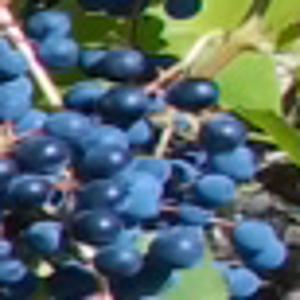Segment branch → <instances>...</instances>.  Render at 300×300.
I'll use <instances>...</instances> for the list:
<instances>
[{
  "mask_svg": "<svg viewBox=\"0 0 300 300\" xmlns=\"http://www.w3.org/2000/svg\"><path fill=\"white\" fill-rule=\"evenodd\" d=\"M270 8V0H253L239 23L227 29L225 37L197 64L195 74L215 79L228 61L236 59L241 53L253 52L260 40L257 22Z\"/></svg>",
  "mask_w": 300,
  "mask_h": 300,
  "instance_id": "branch-1",
  "label": "branch"
}]
</instances>
